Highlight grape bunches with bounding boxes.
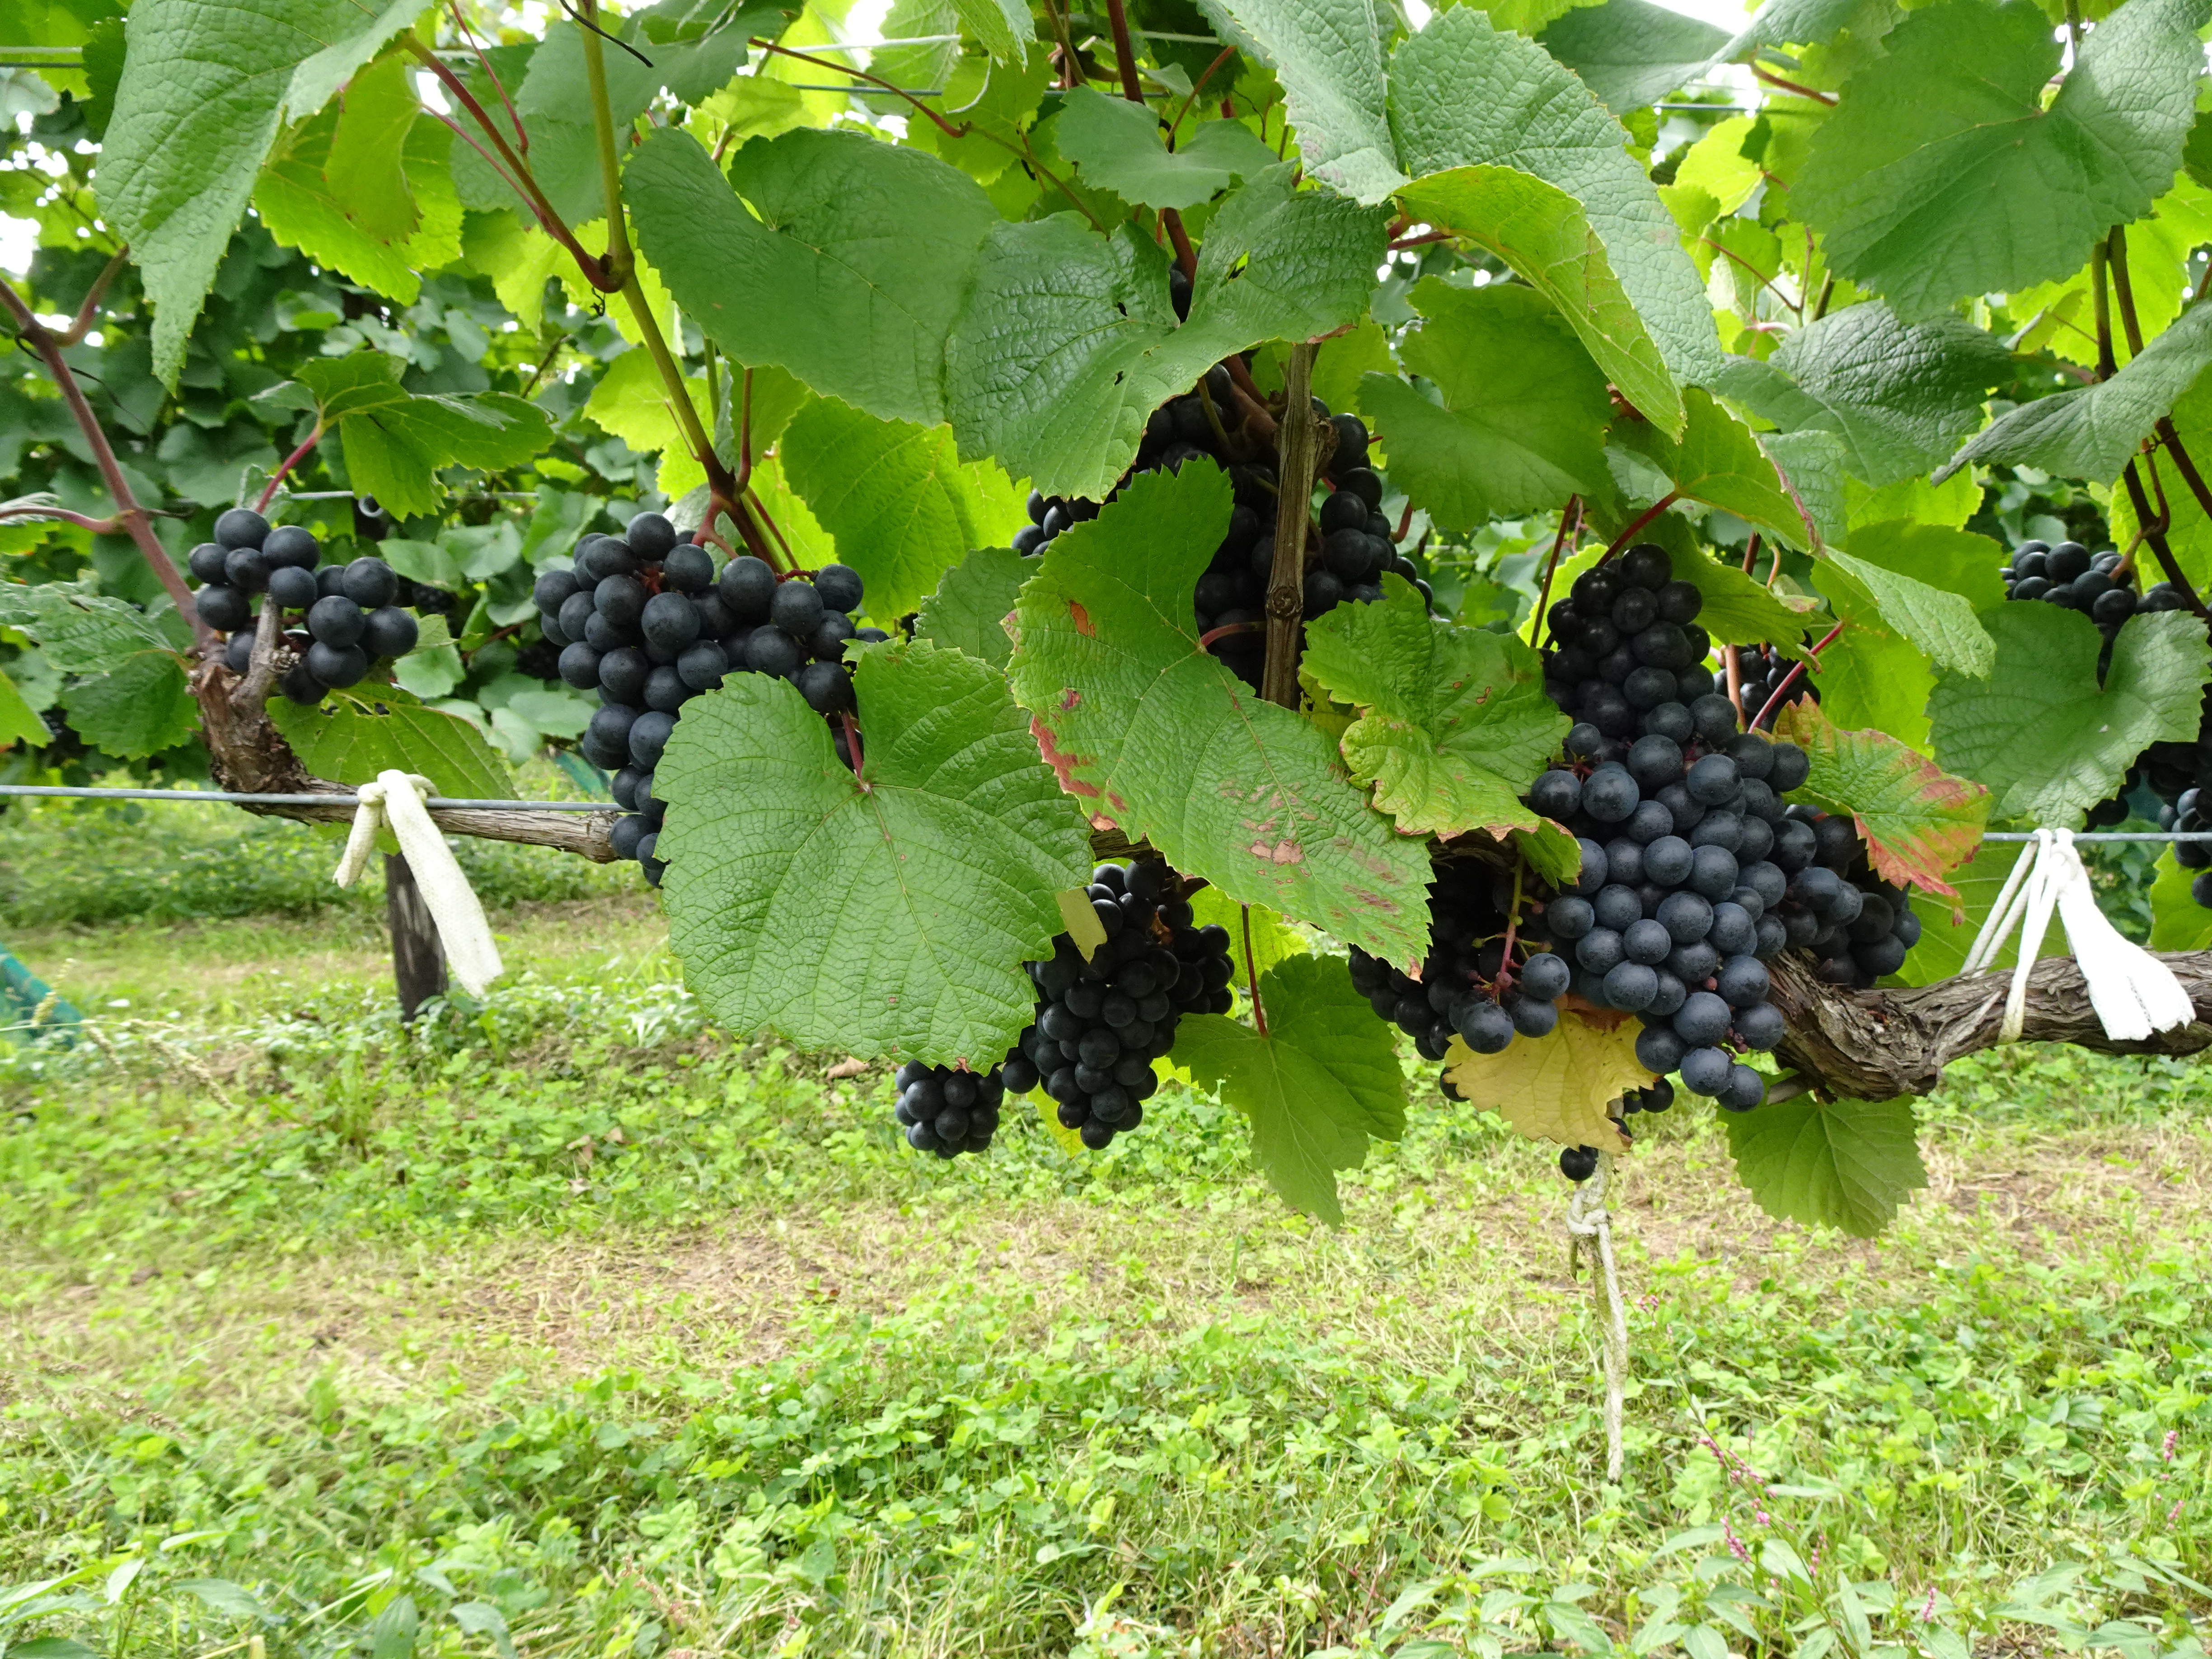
[895,1059,1005,1159]
[2001,541,2188,691]
[1160,924,1234,1015]
[189,508,418,706]
[1713,629,1821,734]
[1002,856,1194,1150]
[2146,712,2212,810]
[533,511,890,889]
[1784,805,1921,989]
[2159,788,2212,908]
[1538,544,1715,740]
[1560,1077,1674,1181]
[1440,1067,1470,1102]
[2081,749,2151,832]
[1348,904,1465,1060]
[1013,342,1433,715]
[1528,694,1817,1112]
[1168,245,1246,324]
[1429,865,1576,1054]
